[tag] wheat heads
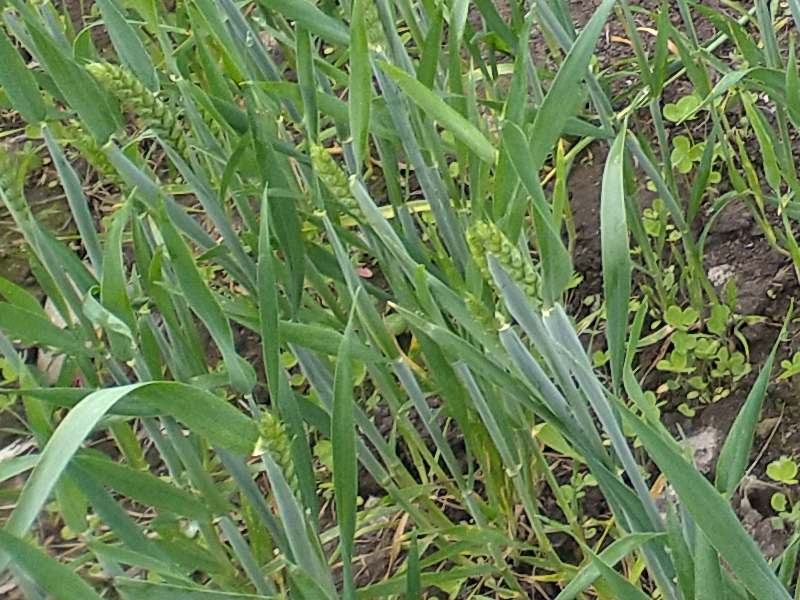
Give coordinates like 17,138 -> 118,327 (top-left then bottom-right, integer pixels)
257,409 -> 297,497
91,57 -> 192,155
0,147 -> 32,217
481,217 -> 540,302
309,143 -> 370,221
354,0 -> 389,52
461,227 -> 498,295
62,121 -> 120,183
461,295 -> 503,352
